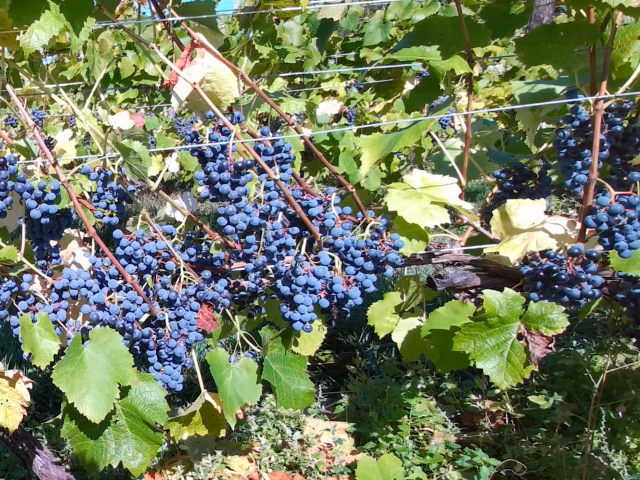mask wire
Wrapping results in <instances>:
<instances>
[{
	"mask_svg": "<svg viewBox=\"0 0 640 480\" xmlns=\"http://www.w3.org/2000/svg\"><path fill=\"white\" fill-rule=\"evenodd\" d=\"M636 97H640V92L612 93V94L595 95V96H589V97H565V98H560L556 100L537 101V102H532L530 104H525V105H503V106H496V107L473 110L468 112L440 113V114H435L430 116L409 117L402 120H385V121L375 122V123L355 124V125H350V126H345L340 128L324 129L321 131H316L314 133L255 136V137L246 138V139H235L233 141V144L237 145V144H248V143H253L257 141L316 138L326 134L342 133V132H347V131H352L357 129H365V128H377V127H383L387 125H404L411 122L432 121V120H437L442 118L470 117V116H476V115L493 113L498 111H505V110H527V109H532L539 106L559 105L567 102H592L597 100H607V99H614V98H636Z\"/></svg>",
	"mask_w": 640,
	"mask_h": 480,
	"instance_id": "1",
	"label": "wire"
},
{
	"mask_svg": "<svg viewBox=\"0 0 640 480\" xmlns=\"http://www.w3.org/2000/svg\"><path fill=\"white\" fill-rule=\"evenodd\" d=\"M300 10H301L300 6H278V7L257 9L252 11L219 12L215 14H201V15H181V16L171 17L167 19L103 22V23H96L94 25V28L98 29V28L116 27V26H145V25L169 24V23L183 21V20H203V19H217L221 17L255 16V15L265 14V13H273V12H280V11H300Z\"/></svg>",
	"mask_w": 640,
	"mask_h": 480,
	"instance_id": "2",
	"label": "wire"
},
{
	"mask_svg": "<svg viewBox=\"0 0 640 480\" xmlns=\"http://www.w3.org/2000/svg\"><path fill=\"white\" fill-rule=\"evenodd\" d=\"M402 0H359L351 2H343L332 5H307V10H335L345 7L361 6V5H394L401 3Z\"/></svg>",
	"mask_w": 640,
	"mask_h": 480,
	"instance_id": "3",
	"label": "wire"
},
{
	"mask_svg": "<svg viewBox=\"0 0 640 480\" xmlns=\"http://www.w3.org/2000/svg\"><path fill=\"white\" fill-rule=\"evenodd\" d=\"M230 143L229 139H224L222 141H209L200 144H191V145H179V146H171V147H162V148H149V153H164V152H173V151H181V150H193V149H202L211 146H224Z\"/></svg>",
	"mask_w": 640,
	"mask_h": 480,
	"instance_id": "4",
	"label": "wire"
},
{
	"mask_svg": "<svg viewBox=\"0 0 640 480\" xmlns=\"http://www.w3.org/2000/svg\"><path fill=\"white\" fill-rule=\"evenodd\" d=\"M120 155H121L120 151L102 152V153L88 154V155H63V156L52 157V158H42L41 163L42 164L54 163V162H60L65 160H90V159H99V158H105V157H115Z\"/></svg>",
	"mask_w": 640,
	"mask_h": 480,
	"instance_id": "5",
	"label": "wire"
},
{
	"mask_svg": "<svg viewBox=\"0 0 640 480\" xmlns=\"http://www.w3.org/2000/svg\"><path fill=\"white\" fill-rule=\"evenodd\" d=\"M498 247L497 243H492V244H476V245H469V246H447V247H441V248H435V249H430V250H421L418 251L417 254H437V253H443V252H449V251H471V250H478V249H495Z\"/></svg>",
	"mask_w": 640,
	"mask_h": 480,
	"instance_id": "6",
	"label": "wire"
}]
</instances>
